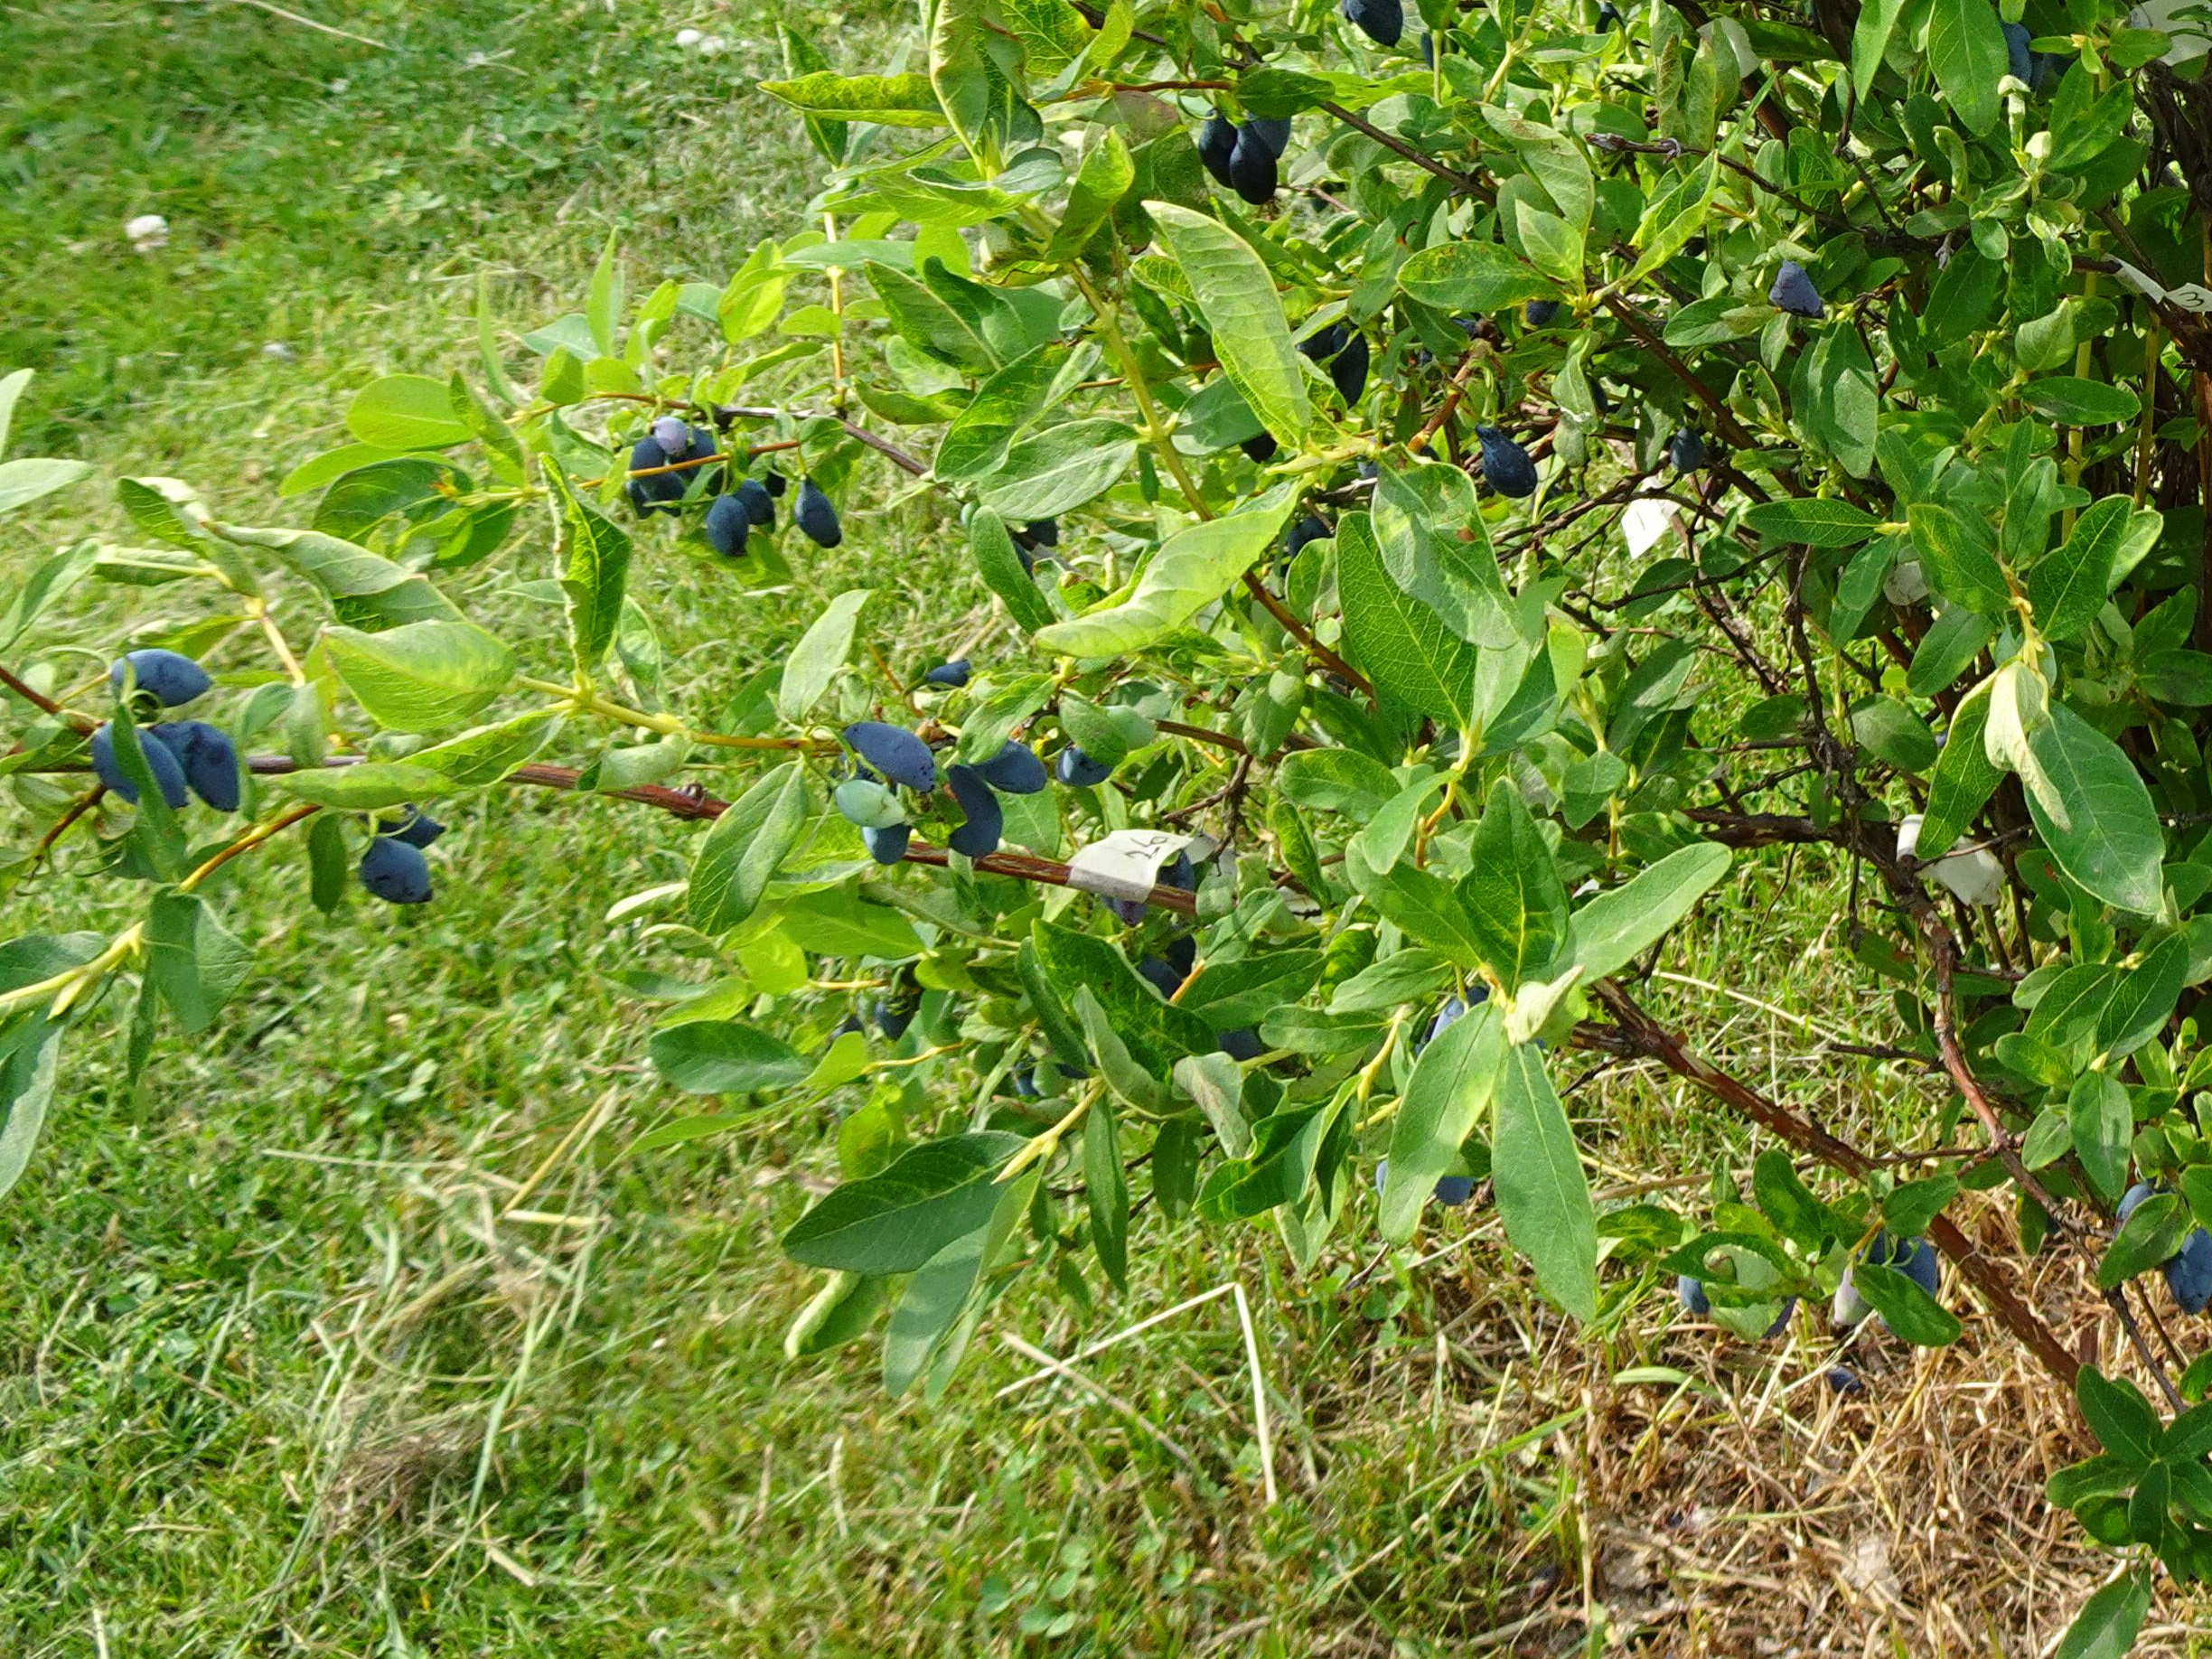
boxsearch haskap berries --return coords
[1874,1238,1941,1295]
[865,825,912,865]
[1244,436,1279,462]
[1333,331,1369,408]
[1167,936,1196,974]
[1595,3,1622,34]
[1162,850,1195,894]
[1220,1027,1258,1059]
[2117,1184,2147,1218]
[736,480,776,522]
[1247,115,1291,160]
[1231,120,1278,204]
[1376,1161,1388,1189]
[1136,961,1186,996]
[1289,517,1333,550]
[943,767,1006,856]
[878,996,915,1042]
[1587,376,1609,415]
[848,724,938,787]
[1670,425,1705,474]
[1116,897,1146,926]
[1484,426,1534,495]
[969,747,1044,792]
[1057,751,1115,786]
[1769,261,1826,318]
[798,478,841,551]
[360,842,441,902]
[2029,54,2047,92]
[1764,1297,1795,1338]
[836,783,911,825]
[647,473,691,514]
[1026,518,1062,553]
[1525,301,1560,325]
[657,415,688,453]
[1030,1065,1061,1094]
[764,469,790,493]
[2163,1223,2212,1314]
[1680,1278,1707,1312]
[1015,1066,1038,1099]
[1058,1065,1085,1078]
[1350,0,1399,48]
[1199,115,1245,182]
[928,662,973,691]
[1455,319,1474,336]
[672,433,717,475]
[842,1018,865,1033]
[1835,1264,1866,1323]
[104,648,211,701]
[1423,24,1457,69]
[629,438,665,474]
[1436,1176,1471,1204]
[708,493,749,559]
[1432,986,1487,1037]
[1303,328,1346,359]
[632,482,658,519]
[2001,21,2033,87]
[175,721,242,803]
[91,729,184,804]
[1355,452,1379,478]
[1010,540,1039,574]
[371,808,447,846]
